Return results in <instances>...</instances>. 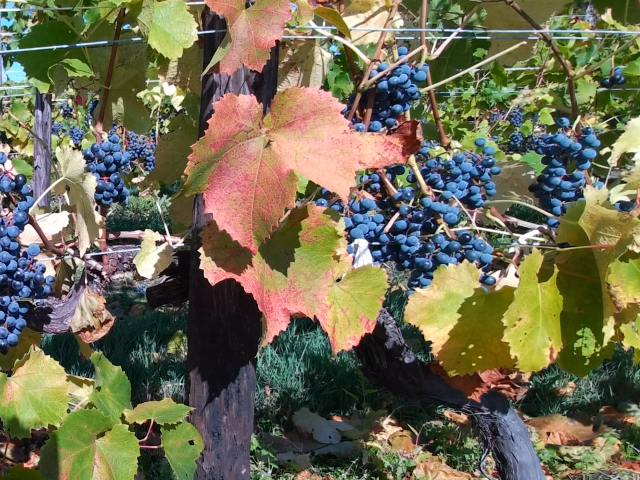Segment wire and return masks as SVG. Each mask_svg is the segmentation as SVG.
<instances>
[{
	"instance_id": "a009ed1b",
	"label": "wire",
	"mask_w": 640,
	"mask_h": 480,
	"mask_svg": "<svg viewBox=\"0 0 640 480\" xmlns=\"http://www.w3.org/2000/svg\"><path fill=\"white\" fill-rule=\"evenodd\" d=\"M302 29L336 31L337 27L333 25H312V24H300V25L285 27L286 31H295V30H302Z\"/></svg>"
},
{
	"instance_id": "f0478fcc",
	"label": "wire",
	"mask_w": 640,
	"mask_h": 480,
	"mask_svg": "<svg viewBox=\"0 0 640 480\" xmlns=\"http://www.w3.org/2000/svg\"><path fill=\"white\" fill-rule=\"evenodd\" d=\"M131 252L141 253L142 249L139 248V247L107 249V250H101V251H97V252L87 253L86 257L87 258H93V257H100V256H103V255L118 254V253H131Z\"/></svg>"
},
{
	"instance_id": "a73af890",
	"label": "wire",
	"mask_w": 640,
	"mask_h": 480,
	"mask_svg": "<svg viewBox=\"0 0 640 480\" xmlns=\"http://www.w3.org/2000/svg\"><path fill=\"white\" fill-rule=\"evenodd\" d=\"M145 40L144 36H139L135 38H125V39H116V40H104V41H86L79 43H68V44H55V45H45V46H37L23 49H0V54H25L39 51H47V50H58V49H71V48H82L88 46H106V45H118V44H127V43H137Z\"/></svg>"
},
{
	"instance_id": "4f2155b8",
	"label": "wire",
	"mask_w": 640,
	"mask_h": 480,
	"mask_svg": "<svg viewBox=\"0 0 640 480\" xmlns=\"http://www.w3.org/2000/svg\"><path fill=\"white\" fill-rule=\"evenodd\" d=\"M94 9H95L94 5L63 6V7H52V8H17V9L0 7V12L8 13V14L54 13V12H65V11H88V10H94Z\"/></svg>"
},
{
	"instance_id": "d2f4af69",
	"label": "wire",
	"mask_w": 640,
	"mask_h": 480,
	"mask_svg": "<svg viewBox=\"0 0 640 480\" xmlns=\"http://www.w3.org/2000/svg\"><path fill=\"white\" fill-rule=\"evenodd\" d=\"M349 31H380L392 33H418V32H445L456 34H490L500 35L506 33H545V34H565V35H601L614 34L625 36H640V31H627L616 29L598 30H567V29H547V28H504L492 29H459L447 27H415V28H395L383 26H350Z\"/></svg>"
}]
</instances>
